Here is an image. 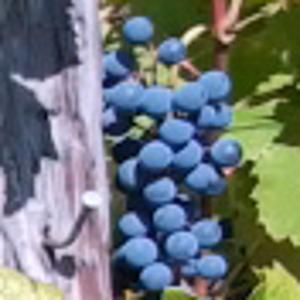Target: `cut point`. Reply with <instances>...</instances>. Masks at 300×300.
Masks as SVG:
<instances>
[{
	"mask_svg": "<svg viewBox=\"0 0 300 300\" xmlns=\"http://www.w3.org/2000/svg\"><path fill=\"white\" fill-rule=\"evenodd\" d=\"M213 27L212 20L205 21L204 23L189 29L183 36L182 41L184 43H190L194 38L204 35L206 32L210 31Z\"/></svg>",
	"mask_w": 300,
	"mask_h": 300,
	"instance_id": "1",
	"label": "cut point"
}]
</instances>
